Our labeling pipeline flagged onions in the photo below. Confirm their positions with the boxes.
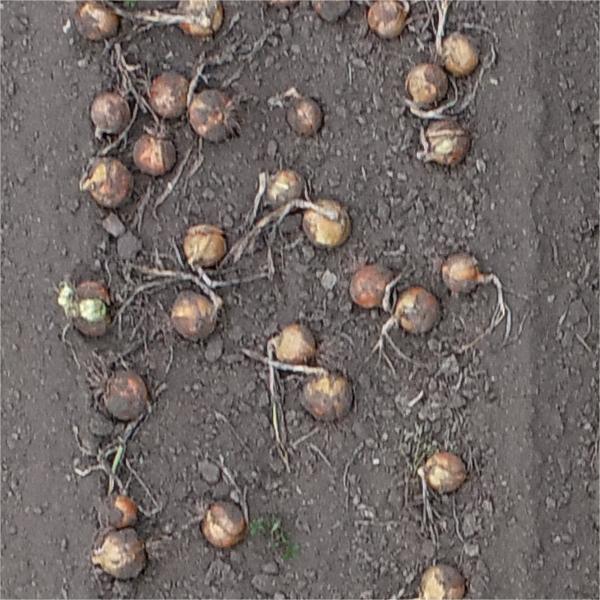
[441,251,478,288]
[72,292,108,336]
[348,263,394,307]
[284,95,321,133]
[423,450,464,491]
[266,0,299,10]
[440,33,476,73]
[300,369,350,417]
[111,493,141,524]
[314,0,347,21]
[81,158,131,205]
[75,277,108,305]
[421,118,468,163]
[97,370,145,421]
[201,499,246,546]
[93,528,144,578]
[393,285,438,331]
[77,1,119,39]
[273,322,314,364]
[183,224,226,266]
[90,90,130,138]
[260,166,304,208]
[189,89,238,138]
[405,62,444,103]
[176,1,218,38]
[147,72,189,116]
[366,0,407,36]
[301,198,347,246]
[416,562,464,599]
[131,132,173,174]
[168,290,217,338]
